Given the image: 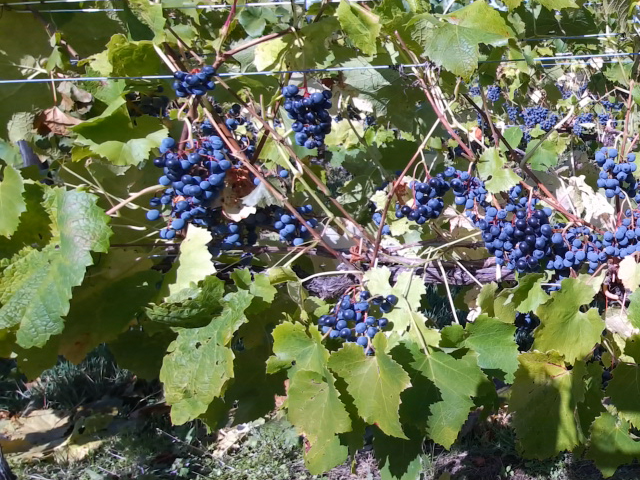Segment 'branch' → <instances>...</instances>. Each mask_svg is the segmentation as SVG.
<instances>
[{
  "label": "branch",
  "instance_id": "45aa463d",
  "mask_svg": "<svg viewBox=\"0 0 640 480\" xmlns=\"http://www.w3.org/2000/svg\"><path fill=\"white\" fill-rule=\"evenodd\" d=\"M197 106L198 100L195 97H192L188 103V113L182 118V127L177 142V152L180 156L185 154L184 145L189 130V121L195 122L197 120Z\"/></svg>",
  "mask_w": 640,
  "mask_h": 480
},
{
  "label": "branch",
  "instance_id": "30e6481e",
  "mask_svg": "<svg viewBox=\"0 0 640 480\" xmlns=\"http://www.w3.org/2000/svg\"><path fill=\"white\" fill-rule=\"evenodd\" d=\"M416 76H417V79L419 80V82L421 83V85L423 86V89H424V91H425V93L427 95V99H428V102L430 104L431 110H432V112H433V114L435 115L436 118L432 121V124H431V126L429 128V131L426 134V136L423 138V140L418 145V147L413 152V154L409 157L407 163L405 164L404 168L402 169V172L399 174V176L396 178V180L391 185V188L388 191L387 197H386V199L384 201V205L382 207L381 216H380V223L378 224V227H377L376 239L375 240L368 234V232L364 229L363 225L357 220V218L350 211L346 210L345 207L338 201V199L336 197H334L324 187V185L318 180V178L315 176V174L306 166V164L303 162V160L298 156V153L290 146V144L284 139V137L279 132H277L276 130H274L272 128V122L275 120L277 112L279 111V109H280V107H281V105L283 103V100L281 98H278L275 101V103L273 104V107L270 110V113H269L268 117L266 118V120H264L260 116V114L254 110V108L247 102V100L242 96V94L236 88H234L231 84L225 82V80L223 78H221L219 75H216L214 77V81L216 83H218L223 89L229 91L240 102V104L245 108V110L255 119V121L262 127V129L265 131L263 133V135H262L261 141H260L257 149L254 151V153L252 154L251 158L247 154V151L230 134V131L225 126L223 120L221 119V116L218 114L216 108L211 103L209 97L207 95H201L199 97V102L201 103V105L205 109V111L207 112L209 118L212 120V123L214 124L216 130L219 132V135L221 136V138L233 150V152L238 156V158L240 159V162L243 165H246L248 167V169L253 173L254 177L262 185H265L267 188H269L273 193H275L283 201V203L289 208V211L296 218V220L307 231L311 232V234L316 238L318 243L329 254H331L332 257L338 263H340L343 267H345L347 270L351 271L352 273H355L357 271V267L355 265H353L352 263H349L346 259L342 258L339 255L338 252H334L333 248L325 241V239L318 232V230L312 224L307 222L305 220V218L299 213V211L297 210V208L294 205V203L277 186H275L267 178H264L261 175L260 171L255 167V165L257 164L258 158L260 157V155L264 151V149H265V147H266V145L268 143L269 137L271 135L291 155V158L296 162V164L299 166V168L302 170V172L305 175L308 176V178L311 180V182L314 184V186L319 190V192L330 203H332V205L336 209H338V211L344 217H346L356 227L357 231L361 234L363 239L374 248V254H373V256L371 258V261L369 263V267L373 268L375 263H376L377 256H378L379 253L382 256H385V257H387L389 255V252L380 245V241H381L382 230H383V227L385 226V218H386L387 209L389 207V203H390V201L392 199V196H393L394 192L396 191V187L400 184L401 180L406 176L407 171L409 170V168L412 165L413 161L416 159L418 154L422 151V149L424 148V146L426 145L428 140L431 139V136L433 135L438 122L441 121L443 126L455 137V139L457 141V144L459 145L461 151L468 157V159L472 163H476L477 160H478V157L476 156V153L474 151H472L470 148H466V146L464 145V142L462 141L459 133L453 127H451L449 125V123L446 121L445 117L443 115H441L439 113V111L437 110L435 102H434L433 97H432V93H431V91H430V89L428 87V84L424 80L421 72L417 71L416 72Z\"/></svg>",
  "mask_w": 640,
  "mask_h": 480
},
{
  "label": "branch",
  "instance_id": "982ccf7c",
  "mask_svg": "<svg viewBox=\"0 0 640 480\" xmlns=\"http://www.w3.org/2000/svg\"><path fill=\"white\" fill-rule=\"evenodd\" d=\"M166 31L177 44L181 45L184 49H186L190 53V55L194 58V60L198 63V65L201 68H205L207 66V63L200 56L197 50L194 47H192L186 40L181 38L171 26H168L166 28Z\"/></svg>",
  "mask_w": 640,
  "mask_h": 480
},
{
  "label": "branch",
  "instance_id": "325d2c04",
  "mask_svg": "<svg viewBox=\"0 0 640 480\" xmlns=\"http://www.w3.org/2000/svg\"><path fill=\"white\" fill-rule=\"evenodd\" d=\"M463 98L466 99L476 110L477 112L480 114V116L482 117V119L484 120L485 124L492 128L493 131L499 136V138L502 140L505 148L508 150V152L510 153V155L514 158V160L516 161V163L518 164V166L526 173H528L533 180L538 184V186L540 188H542L543 192L545 193V195L547 196V198H545L543 195H541L539 192H537L534 188L533 185L527 183L526 181H521L520 185L529 189V191L539 200H541L543 203L548 204L554 211H556L559 215H562V217L571 225H573L574 227L578 226V223L583 225V226H587L588 228H591L594 232L599 233L600 235L604 234V231L602 228H599L597 226H595L593 223H589L586 220H583L581 218H579L578 216L570 213V212H566L565 209L563 208V206L553 197V195L551 194V192L548 190L547 186L545 183H543L538 175L536 173H534L530 168H528L520 159V157L515 153V151L513 150V148L510 146L506 136L502 133V131L496 126L494 125L488 118V116L485 114L484 110L476 103L475 100H473L467 93L463 94Z\"/></svg>",
  "mask_w": 640,
  "mask_h": 480
},
{
  "label": "branch",
  "instance_id": "1ff4a987",
  "mask_svg": "<svg viewBox=\"0 0 640 480\" xmlns=\"http://www.w3.org/2000/svg\"><path fill=\"white\" fill-rule=\"evenodd\" d=\"M632 97H633V92L629 91L628 95H627V103H626V108H625V123H624V130H623V145H622L621 152L619 153V161L620 162L624 161V155L626 154L627 147H628V132H629V125H630V110H631V105H632Z\"/></svg>",
  "mask_w": 640,
  "mask_h": 480
},
{
  "label": "branch",
  "instance_id": "ea751061",
  "mask_svg": "<svg viewBox=\"0 0 640 480\" xmlns=\"http://www.w3.org/2000/svg\"><path fill=\"white\" fill-rule=\"evenodd\" d=\"M162 47L167 51V54L171 57L175 65L179 68L182 73H186L188 68L184 65V63L180 60V57L174 52V49L170 46L167 41L162 43Z\"/></svg>",
  "mask_w": 640,
  "mask_h": 480
},
{
  "label": "branch",
  "instance_id": "170604dd",
  "mask_svg": "<svg viewBox=\"0 0 640 480\" xmlns=\"http://www.w3.org/2000/svg\"><path fill=\"white\" fill-rule=\"evenodd\" d=\"M296 30H297V26L295 24H292L287 28L281 29V30L276 31V32H272L270 34L262 36L261 38L253 39L252 41H248L246 43H243L242 45H239V46H236V47L231 48L229 50H226V51L222 52L213 61V66L215 68H218L220 66V64L223 62V60L227 59L228 57H232L234 55L239 56L242 52H244V51H246V50H248L250 48H254L256 46L263 45L264 43H267V42L272 41L274 39L282 38L283 36L289 35V34L295 32Z\"/></svg>",
  "mask_w": 640,
  "mask_h": 480
}]
</instances>
